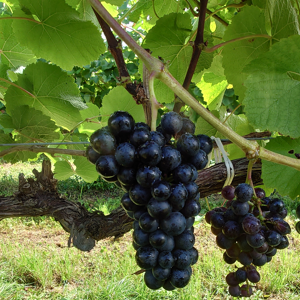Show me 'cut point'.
Returning a JSON list of instances; mask_svg holds the SVG:
<instances>
[{
  "label": "cut point",
  "instance_id": "obj_1",
  "mask_svg": "<svg viewBox=\"0 0 300 300\" xmlns=\"http://www.w3.org/2000/svg\"><path fill=\"white\" fill-rule=\"evenodd\" d=\"M157 76L155 70H150L149 75V91L152 100V124L151 129L152 131H156L157 128V98L154 92V78Z\"/></svg>",
  "mask_w": 300,
  "mask_h": 300
},
{
  "label": "cut point",
  "instance_id": "obj_2",
  "mask_svg": "<svg viewBox=\"0 0 300 300\" xmlns=\"http://www.w3.org/2000/svg\"><path fill=\"white\" fill-rule=\"evenodd\" d=\"M247 159L249 160V163H248L247 177L245 183L250 184L254 189L253 182H252V167L259 158H247Z\"/></svg>",
  "mask_w": 300,
  "mask_h": 300
}]
</instances>
